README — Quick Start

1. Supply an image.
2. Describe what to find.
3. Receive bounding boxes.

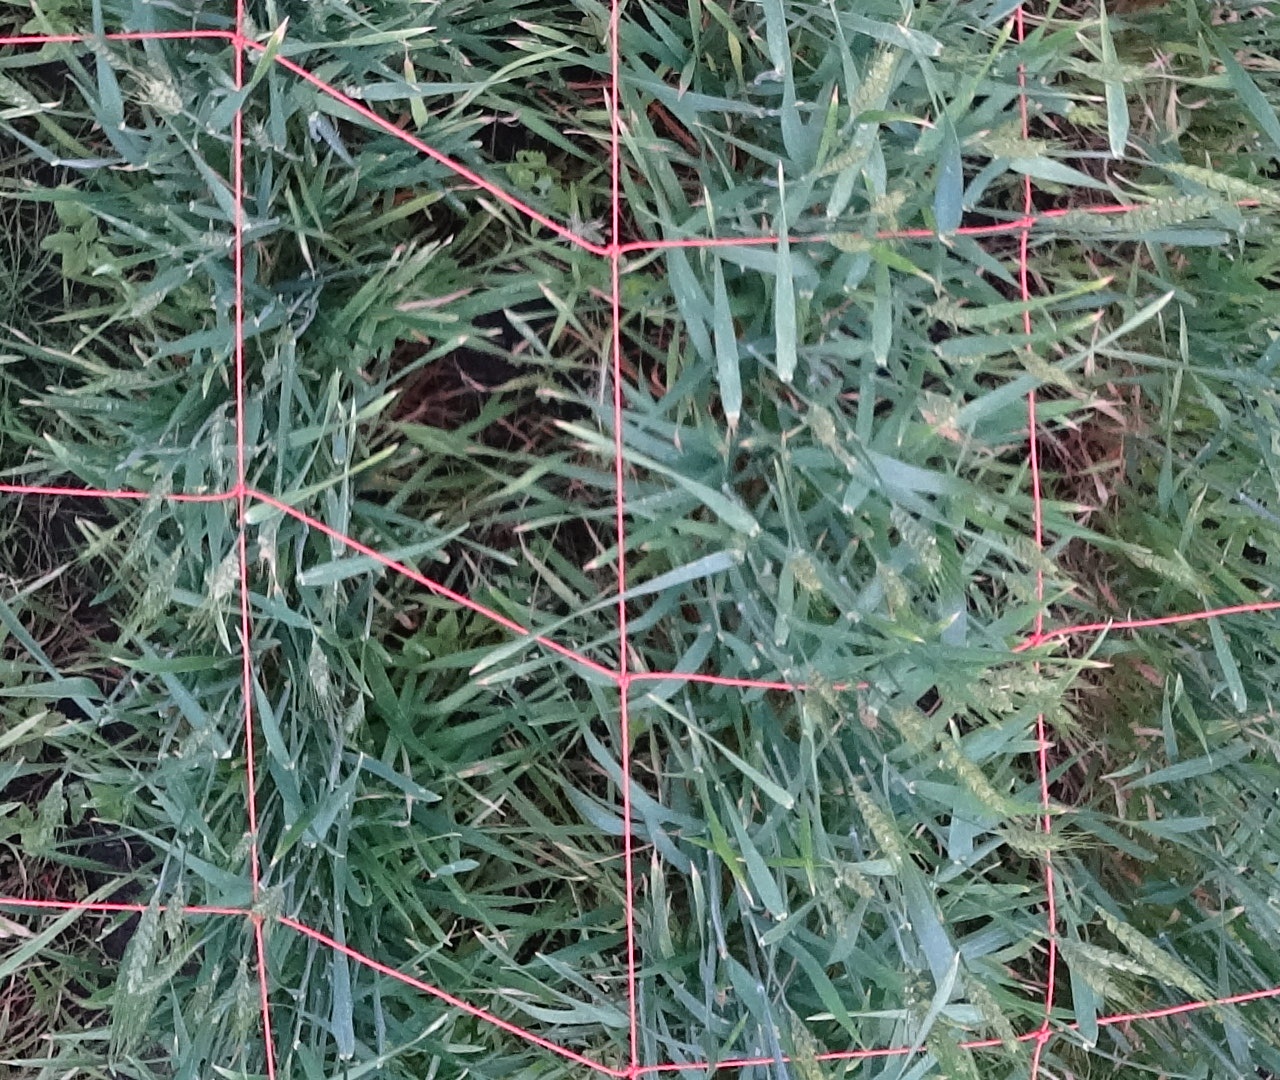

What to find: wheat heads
[1054,943,1122,1007]
[226,828,257,861]
[962,961,1014,1047]
[998,835,1070,857]
[1017,346,1082,393]
[1136,547,1187,583]
[168,889,188,936]
[77,21,124,82]
[925,294,976,331]
[891,710,931,755]
[950,672,1019,722]
[1119,201,1225,236]
[144,80,183,120]
[783,547,816,592]
[814,856,874,899]
[1056,100,1100,132]
[913,383,963,435]
[174,714,229,760]
[133,291,162,319]
[85,367,146,395]
[1064,49,1157,89]
[869,193,906,225]
[888,501,939,563]
[1169,158,1279,214]
[1055,207,1112,239]
[776,1007,822,1069]
[800,400,836,438]
[208,408,226,468]
[798,661,838,708]
[214,549,242,603]
[850,49,894,108]
[140,472,176,510]
[978,131,1051,164]
[975,663,1051,694]
[145,547,176,597]
[130,897,162,980]
[816,143,860,177]
[0,70,36,117]
[938,731,998,811]
[1063,932,1145,978]
[305,633,335,695]
[829,227,873,258]
[979,520,1060,580]
[878,570,906,606]
[842,775,898,850]
[1094,901,1212,991]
